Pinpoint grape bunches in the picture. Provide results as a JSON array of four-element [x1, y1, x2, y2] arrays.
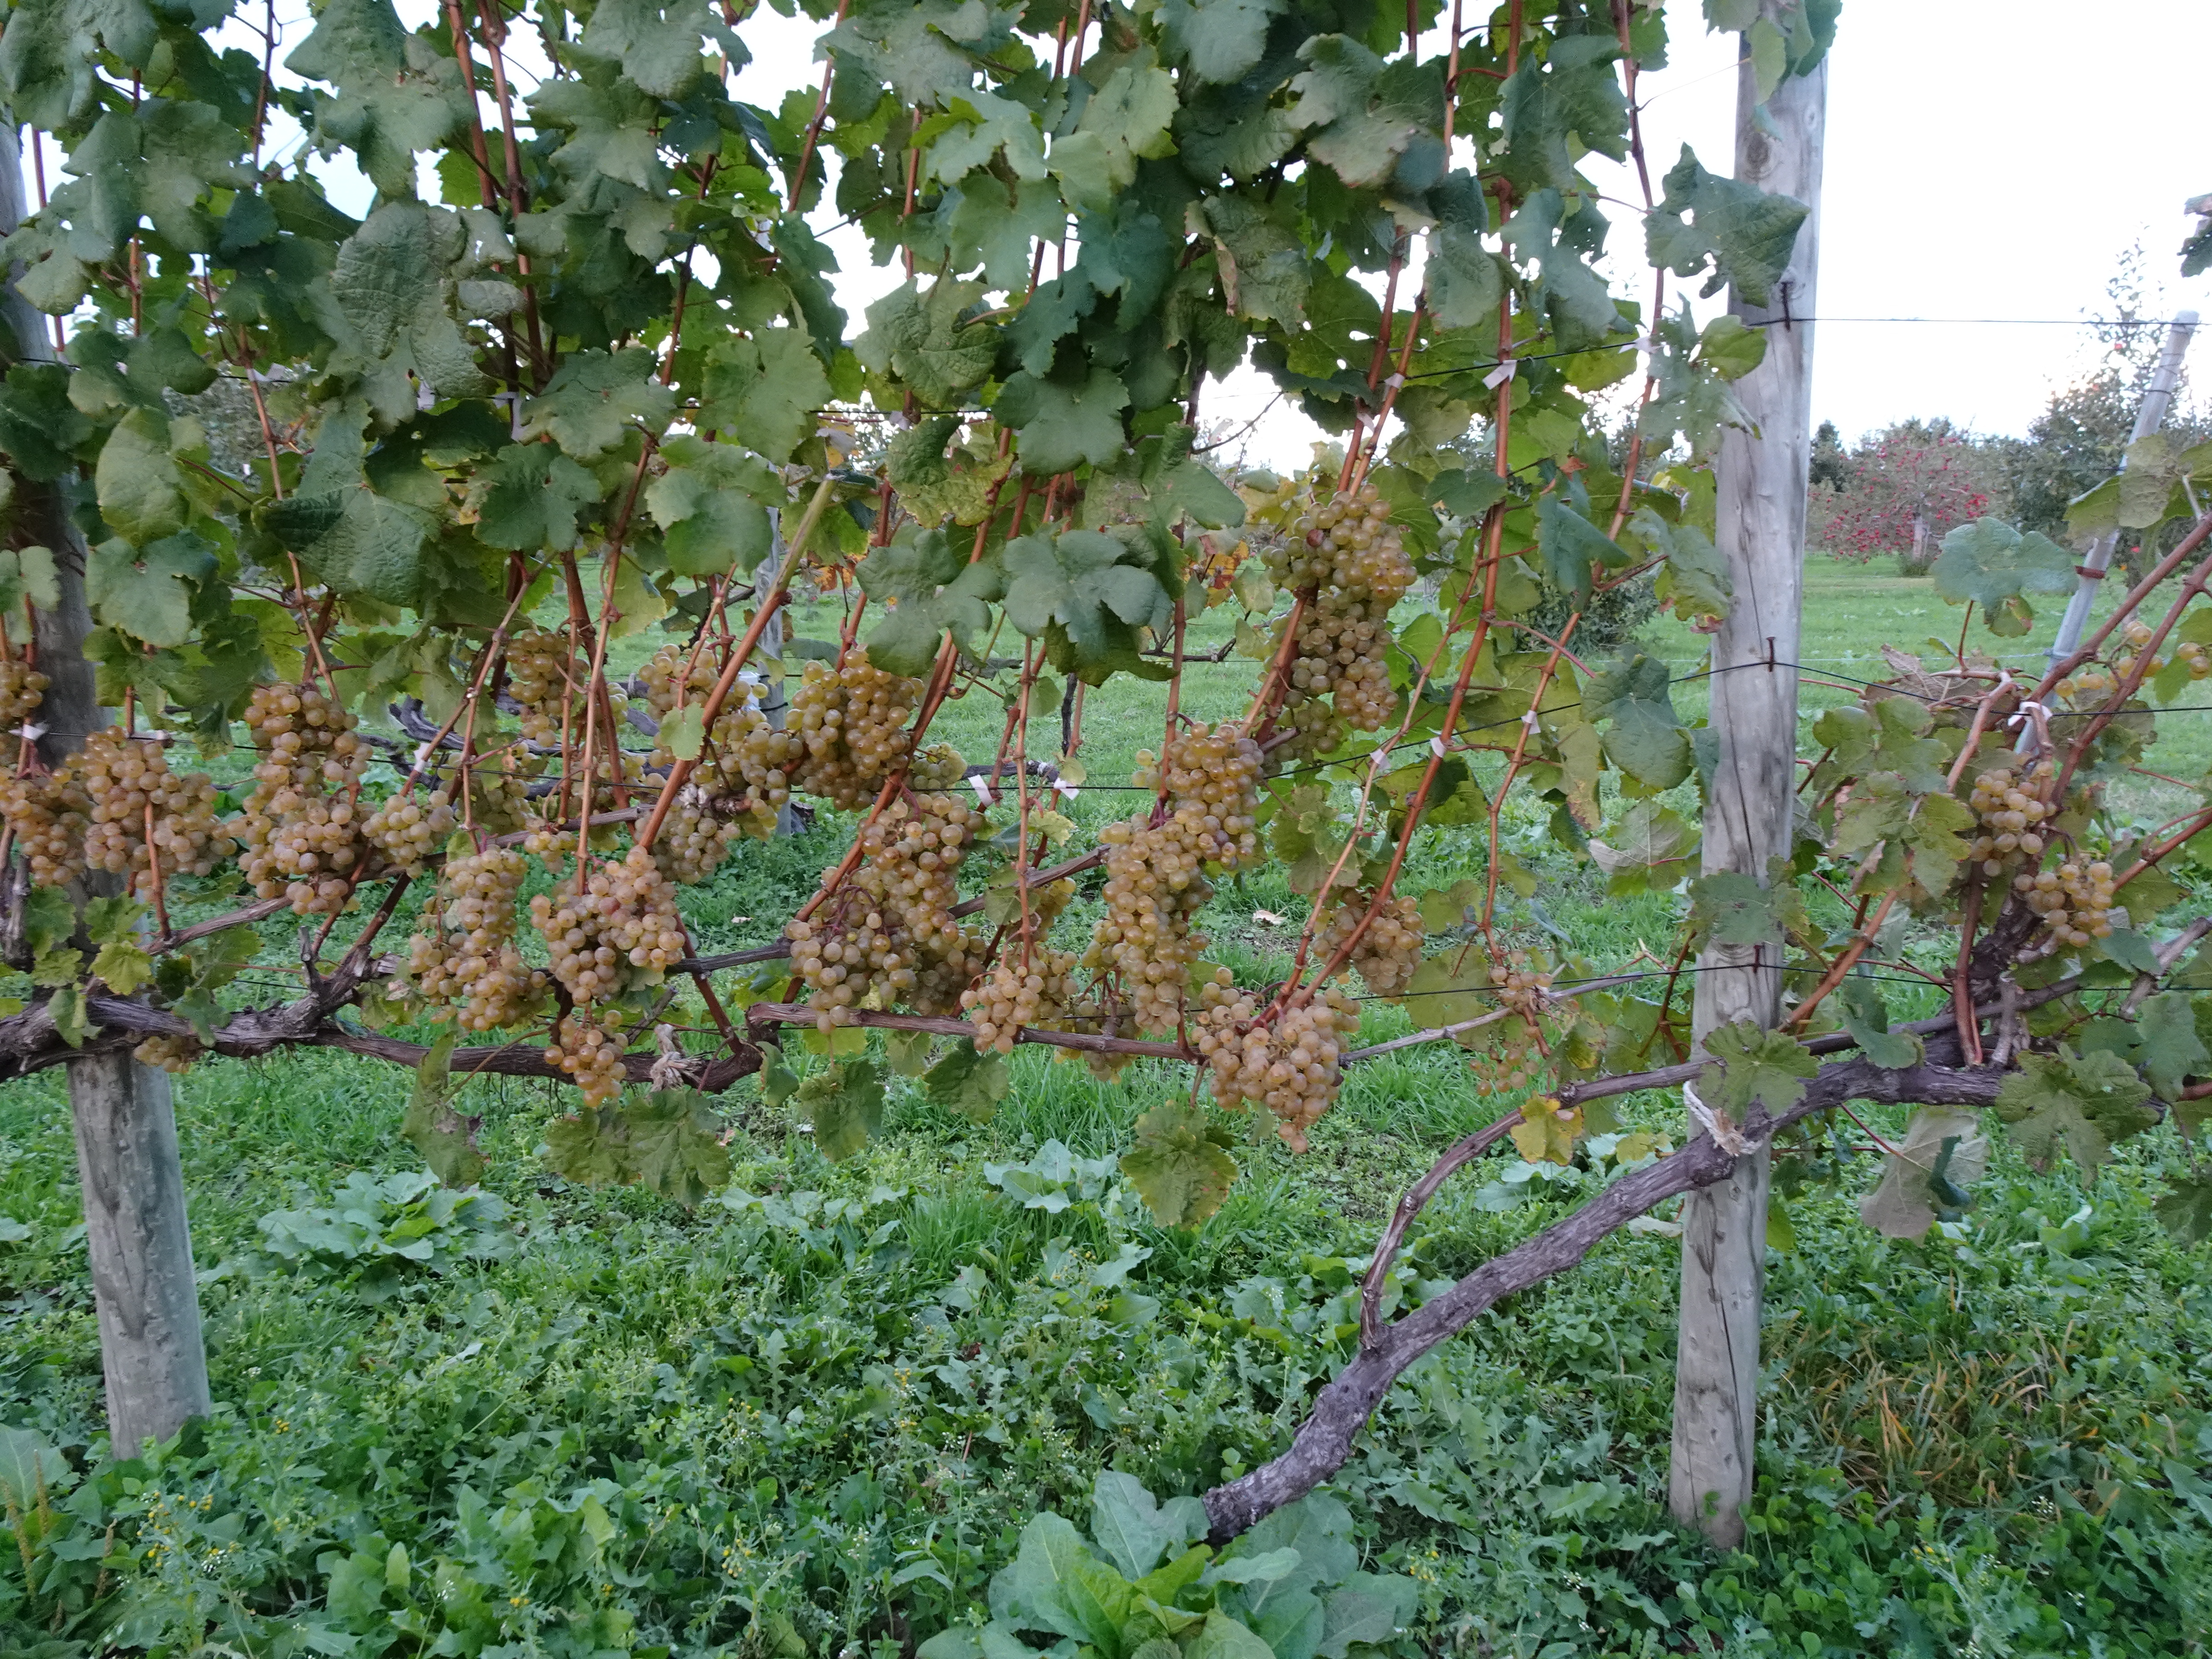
[[1053, 993, 1138, 1083], [1181, 964, 1261, 1111], [1275, 689, 1342, 769], [959, 966, 1043, 1055], [404, 932, 463, 1020], [445, 846, 529, 949], [566, 736, 688, 806], [1337, 659, 1401, 734], [359, 787, 457, 878], [128, 1016, 208, 1080], [1255, 484, 1386, 588], [2011, 858, 2116, 950], [1311, 911, 1358, 980], [457, 949, 551, 1034], [433, 745, 490, 824], [1238, 1006, 1343, 1157], [1113, 937, 1183, 1035], [891, 793, 995, 868], [1085, 812, 1172, 948], [543, 1009, 630, 1109], [1305, 985, 1367, 1035], [1488, 946, 1555, 1020], [800, 761, 876, 816], [229, 792, 296, 902], [603, 675, 632, 740], [530, 876, 625, 1002], [1000, 858, 1081, 944], [1284, 594, 1364, 655], [907, 736, 969, 795], [785, 659, 845, 761], [1164, 721, 1261, 869], [1330, 523, 1420, 622], [45, 723, 127, 803], [2175, 639, 2209, 680], [709, 676, 771, 745], [244, 681, 302, 787], [638, 644, 723, 717], [1002, 943, 1081, 1027], [1350, 897, 1425, 1005], [917, 921, 987, 1004], [0, 658, 51, 756], [839, 644, 922, 781], [1291, 652, 1337, 695], [1353, 614, 1394, 666], [845, 904, 923, 1011], [151, 772, 236, 880], [691, 756, 719, 790], [1467, 1037, 1543, 1096], [1938, 889, 2002, 932], [81, 745, 164, 872], [1151, 838, 1225, 970], [289, 788, 361, 910], [1076, 942, 1126, 983], [502, 629, 570, 768], [487, 772, 537, 832], [522, 828, 583, 873], [415, 893, 461, 929], [719, 728, 790, 838], [673, 805, 734, 885], [296, 691, 373, 792], [849, 825, 967, 969], [1131, 746, 1162, 796], [588, 843, 687, 974], [2053, 618, 2168, 698], [0, 769, 91, 888], [1964, 753, 2057, 877], [784, 919, 864, 1037]]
